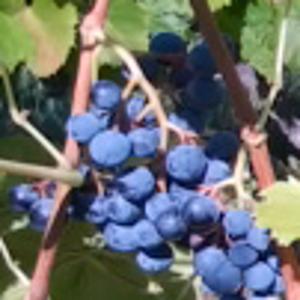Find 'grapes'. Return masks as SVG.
Here are the masks:
<instances>
[{
	"instance_id": "grapes-1",
	"label": "grapes",
	"mask_w": 300,
	"mask_h": 300,
	"mask_svg": "<svg viewBox=\"0 0 300 300\" xmlns=\"http://www.w3.org/2000/svg\"><path fill=\"white\" fill-rule=\"evenodd\" d=\"M208 48L195 46L173 75L182 106L157 122L153 102L123 99L119 84L93 82L86 114L65 124L69 143L85 149L78 168L87 190L71 197L68 217L101 226L107 250L135 255L138 270L164 272L167 242L186 240L205 291L229 296L239 288L254 300H282L280 259L254 206L225 190L240 139L229 130L203 145L202 113L222 101Z\"/></svg>"
},
{
	"instance_id": "grapes-2",
	"label": "grapes",
	"mask_w": 300,
	"mask_h": 300,
	"mask_svg": "<svg viewBox=\"0 0 300 300\" xmlns=\"http://www.w3.org/2000/svg\"><path fill=\"white\" fill-rule=\"evenodd\" d=\"M53 197L42 195L36 185L28 182H15L6 191L11 211L17 215L28 214L29 223L35 229L44 228Z\"/></svg>"
},
{
	"instance_id": "grapes-3",
	"label": "grapes",
	"mask_w": 300,
	"mask_h": 300,
	"mask_svg": "<svg viewBox=\"0 0 300 300\" xmlns=\"http://www.w3.org/2000/svg\"><path fill=\"white\" fill-rule=\"evenodd\" d=\"M148 51L150 55L162 58H180L186 52V46L181 38L172 33H162L153 36Z\"/></svg>"
}]
</instances>
